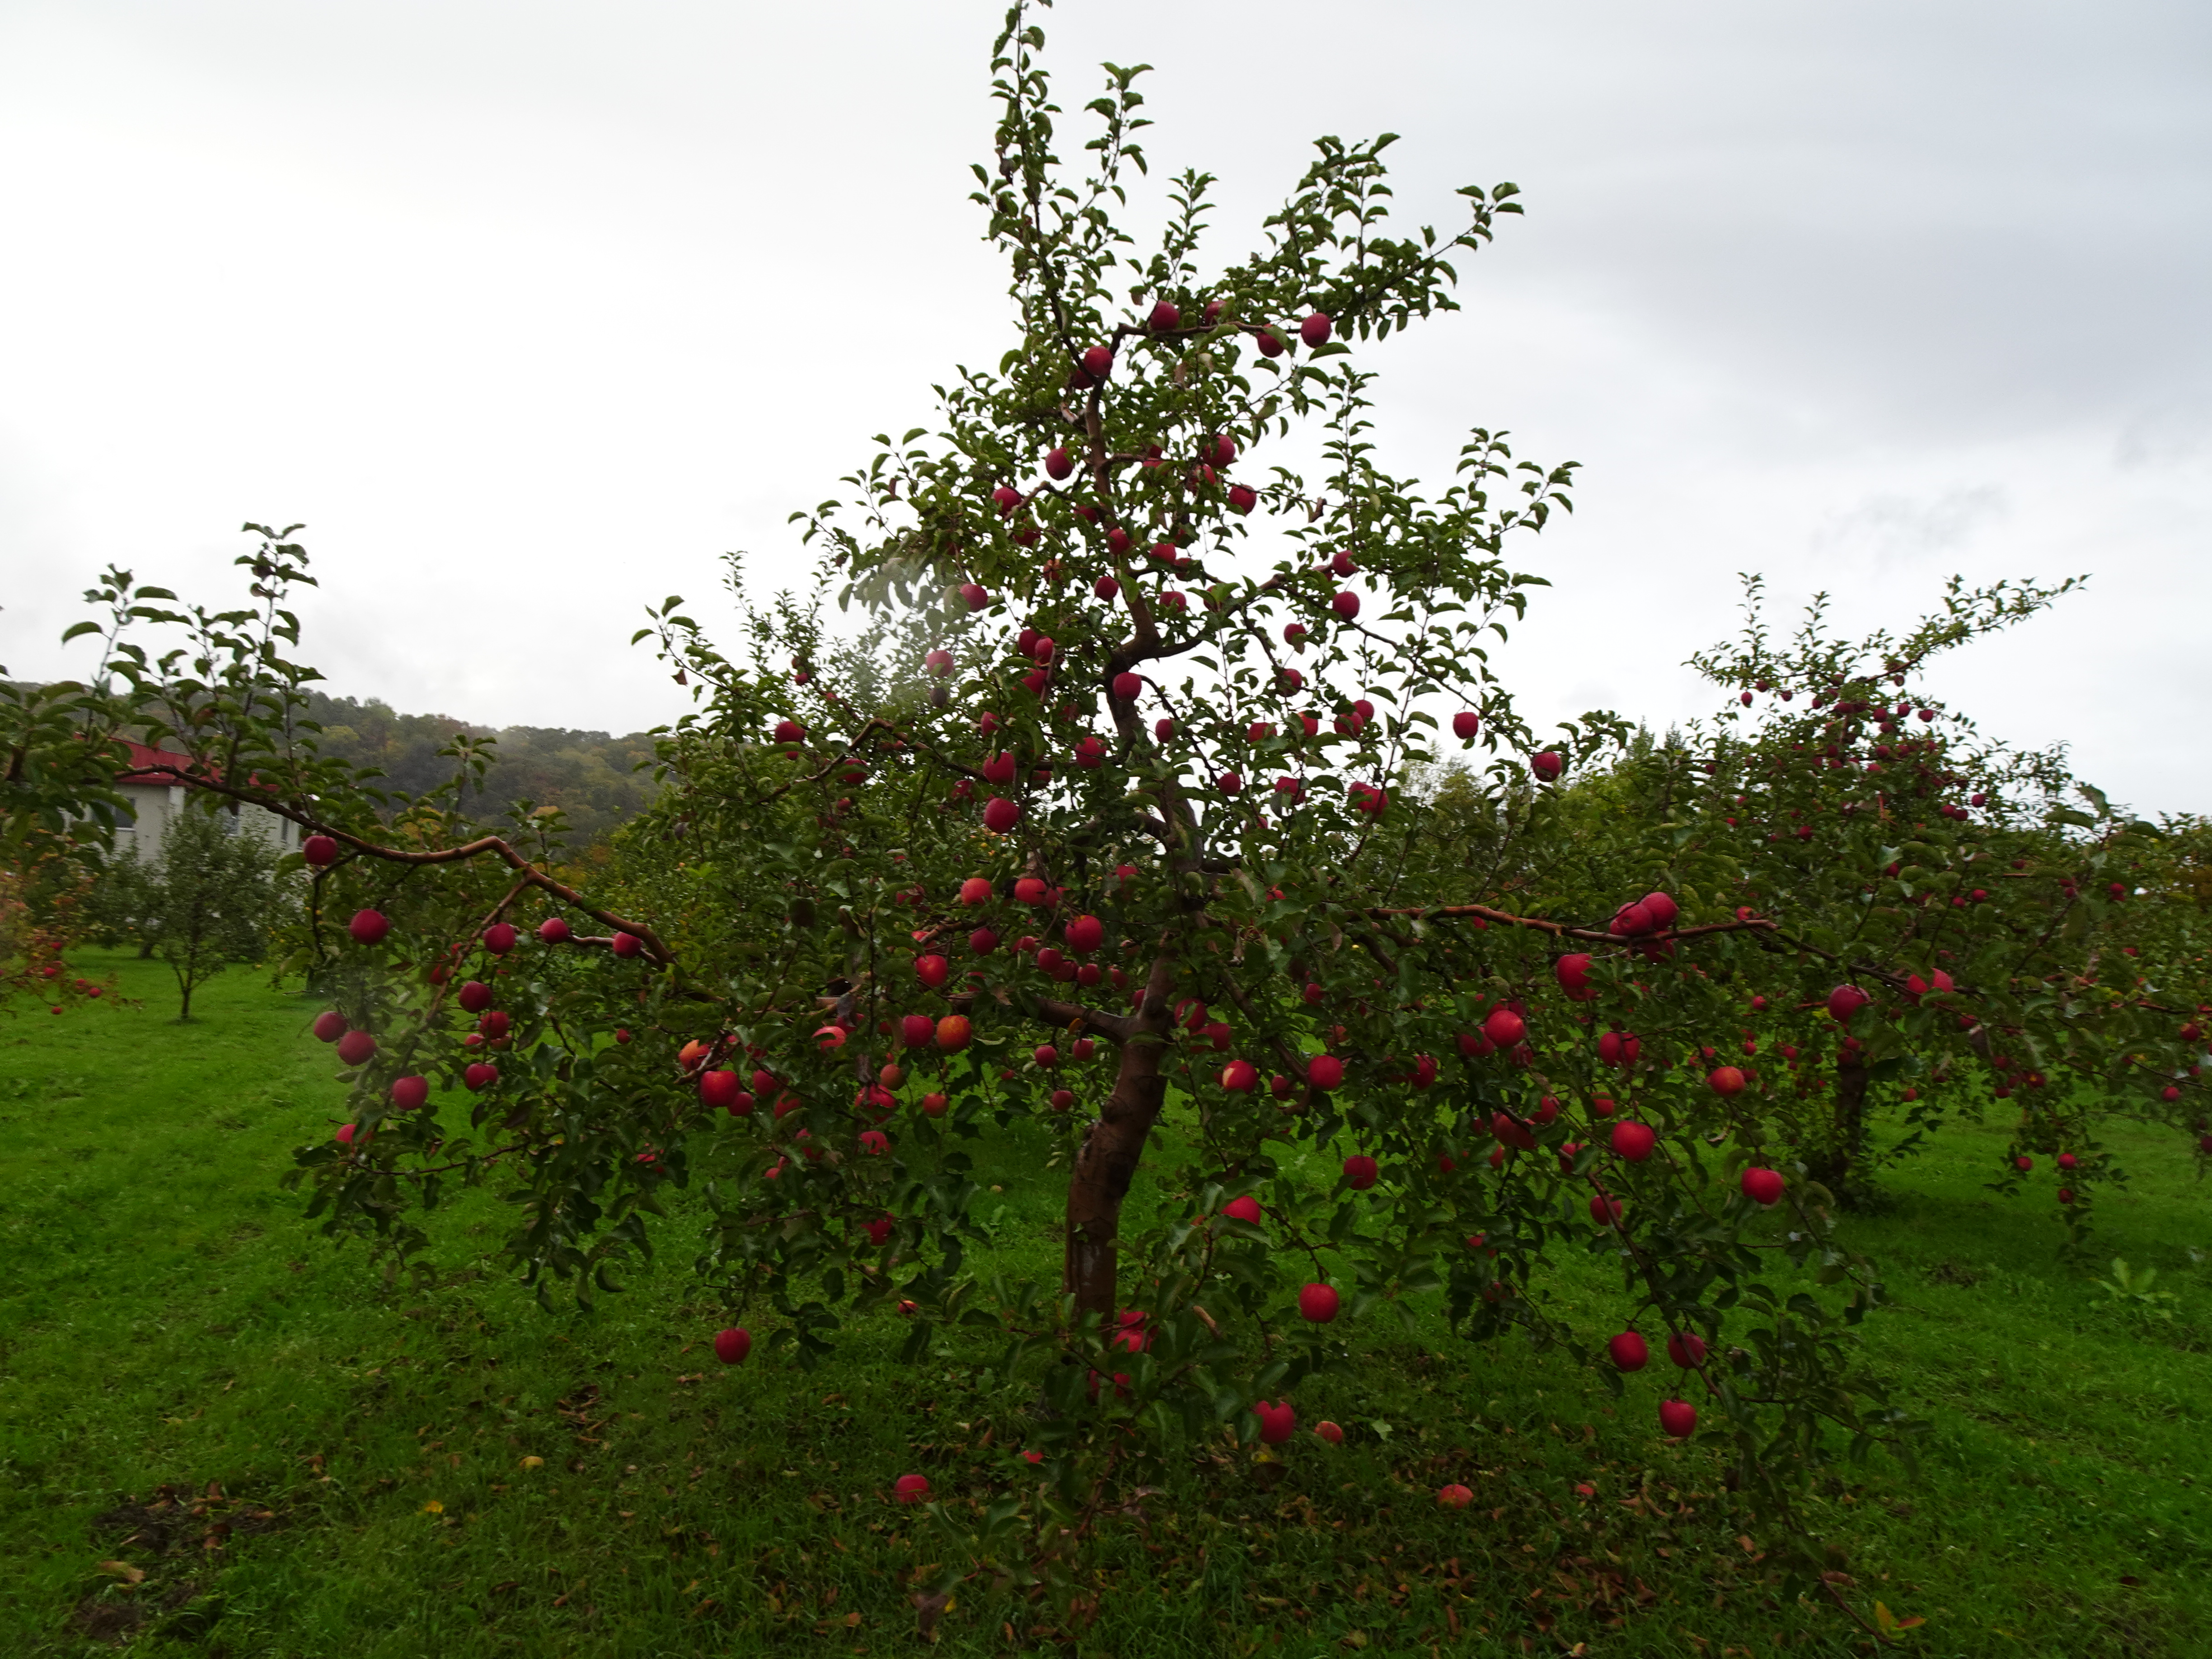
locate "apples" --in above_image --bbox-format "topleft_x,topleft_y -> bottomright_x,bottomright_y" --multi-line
1139,455 -> 1169,489
1220,1192 -> 1263,1238
841,843 -> 855,862
1330,591 -> 1360,622
967,924 -> 1000,959
891,878 -> 926,910
348,906 -> 389,949
1739,1165 -> 1786,1208
1245,720 -> 1278,752
1216,771 -> 1244,798
1297,1283 -> 1340,1324
1082,344 -> 1116,378
1555,951 -> 1605,1004
1274,666 -> 1303,698
1221,1058 -> 1261,1100
892,851 -> 909,869
1268,1072 -> 1301,1102
1041,556 -> 1075,590
854,1078 -> 898,1125
482,922 -> 518,956
1274,776 -> 1308,807
1484,1017 -> 1529,1053
1348,698 -> 1375,727
1146,540 -> 1178,573
1608,1329 -> 1651,1372
1107,862 -> 1144,897
907,925 -> 938,956
1286,707 -> 1320,740
1557,1142 -> 1590,1174
1565,998 -> 1602,1031
956,581 -> 989,613
464,1062 -> 502,1095
727,1091 -> 755,1117
1321,1023 -> 1356,1055
1062,914 -> 1104,955
301,833 -> 339,867
874,726 -> 908,758
1104,962 -> 1134,990
1667,1329 -> 1706,1371
1650,1034 -> 1686,1075
537,915 -> 569,946
1044,446 -> 1078,481
1597,983 -> 1645,1025
1267,881 -> 1294,907
1464,1229 -> 1499,1265
1749,993 -> 1778,1014
725,1027 -> 757,1064
1014,872 -> 1050,910
1364,974 -> 1386,996
1202,300 -> 1238,335
1587,1189 -> 1627,1229
856,1206 -> 899,1252
923,649 -> 955,679
762,1167 -> 793,1194
1092,573 -> 1122,603
1537,1090 -> 1567,1128
713,1324 -> 755,1366
461,1032 -> 490,1056
635,1141 -> 672,1178
391,1073 -> 430,1113
1170,1058 -> 1203,1089
878,1063 -> 905,1090
1843,1032 -> 1872,1055
679,1035 -> 722,1083
934,1014 -> 975,1057
1733,901 -> 1765,928
958,875 -> 995,913
488,1028 -> 519,1050
1642,888 -> 1683,934
983,795 -> 1023,836
792,1125 -> 836,1165
1072,496 -> 1110,534
1023,755 -> 1057,794
476,1010 -> 512,1038
1111,669 -> 1143,706
1117,1302 -> 1150,1332
1904,964 -> 1957,1014
1154,718 -> 1186,745
752,1064 -> 787,1101
1110,1325 -> 1150,1362
1658,1396 -> 1698,1440
1461,1111 -> 1495,1141
795,671 -> 812,686
1414,990 -> 1436,1011
1583,1090 -> 1617,1120
447,941 -> 469,961
1615,898 -> 1655,939
458,980 -> 494,1013
1301,312 -> 1336,349
1173,995 -> 1208,1037
1129,985 -> 1151,1015
1256,321 -> 1289,360
1696,1042 -> 1719,1063
1828,982 -> 1871,1028
1017,627 -> 1045,662
1681,966 -> 1712,993
1471,988 -> 1508,1026
1198,1020 -> 1234,1055
611,926 -> 644,961
337,1029 -> 378,1068
1598,1029 -> 1643,1073
897,1010 -> 936,1045
1485,1143 -> 1519,1170
1010,665 -> 1050,698
1148,299 -> 1182,338
1379,1051 -> 1416,1084
1078,962 -> 1102,987
1430,1145 -> 1472,1194
950,778 -> 980,807
1341,1151 -> 1378,1195
697,1068 -> 740,1108
1200,433 -> 1238,469
1480,1279 -> 1520,1308
989,486 -> 1024,518
1404,1051 -> 1441,1091
850,1127 -> 895,1163
1108,528 -> 1137,558
834,795 -> 853,814
1531,750 -> 1562,785
948,971 -> 988,1008
977,706 -> 1022,742
1086,1358 -> 1138,1407
1729,877 -> 1765,904
897,1294 -> 924,1320
1034,636 -> 1067,668
1180,458 -> 1217,497
333,1122 -> 377,1162
1036,944 -> 1065,976
1243,925 -> 1265,945
1344,780 -> 1376,812
1333,710 -> 1362,742
824,691 -> 835,704
1227,484 -> 1259,516
1332,548 -> 1363,581
1817,1570 -> 1861,1613
1248,1397 -> 1296,1449
1283,622 -> 1308,648
1737,1040 -> 1761,1058
1030,1043 -> 1058,1071
1072,736 -> 1109,771
1609,1117 -> 1657,1165
1465,907 -> 1491,936
421,962 -> 452,986
1799,1077 -> 1827,1100
313,1011 -> 348,1044
1049,1087 -> 1074,1113
1360,787 -> 1390,819
616,1025 -> 636,1046
1158,590 -> 1189,619
1643,933 -> 1682,967
836,756 -> 872,786
1511,1117 -> 1540,1152
913,953 -> 950,992
776,1089 -> 812,1124
1710,1065 -> 1745,1100
834,1004 -> 874,1046
771,716 -> 807,753
1071,1035 -> 1101,1066
1011,516 -> 1045,551
1775,1035 -> 1797,1064
922,1089 -> 952,1121
1500,988 -> 1541,1027
1458,1021 -> 1499,1062
809,1023 -> 847,1061
1299,979 -> 1327,1009
998,1060 -> 1017,1086
1452,711 -> 1479,740
1306,1055 -> 1345,1092
982,748 -> 1020,789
